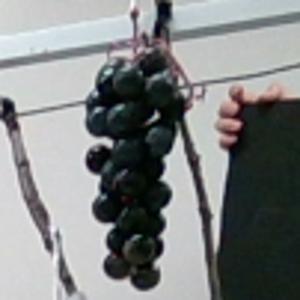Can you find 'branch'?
Segmentation results:
<instances>
[{
	"mask_svg": "<svg viewBox=\"0 0 300 300\" xmlns=\"http://www.w3.org/2000/svg\"><path fill=\"white\" fill-rule=\"evenodd\" d=\"M153 2L156 15L151 32V46H163L167 49L172 65V45L170 40L173 20L172 0H153Z\"/></svg>",
	"mask_w": 300,
	"mask_h": 300,
	"instance_id": "3",
	"label": "branch"
},
{
	"mask_svg": "<svg viewBox=\"0 0 300 300\" xmlns=\"http://www.w3.org/2000/svg\"><path fill=\"white\" fill-rule=\"evenodd\" d=\"M0 108V121L6 128L7 139L13 154L15 173L29 219H32L40 234L44 250L50 257H53L58 276L68 299L86 300L85 292L80 291L76 280L67 267L60 242L51 226V215L46 208V204L40 198L33 177V170H31L30 159H28L22 138L16 101L0 93Z\"/></svg>",
	"mask_w": 300,
	"mask_h": 300,
	"instance_id": "1",
	"label": "branch"
},
{
	"mask_svg": "<svg viewBox=\"0 0 300 300\" xmlns=\"http://www.w3.org/2000/svg\"><path fill=\"white\" fill-rule=\"evenodd\" d=\"M180 132L183 152L189 174L192 178L195 196L198 202L197 211L201 217L200 237L204 245V263L206 266V284L209 289V300H220V275L216 258V247L213 238L212 221L215 215L212 213L208 194L205 190V181L201 168L202 155L198 154L196 144L189 130L186 110L181 119L174 122Z\"/></svg>",
	"mask_w": 300,
	"mask_h": 300,
	"instance_id": "2",
	"label": "branch"
}]
</instances>
